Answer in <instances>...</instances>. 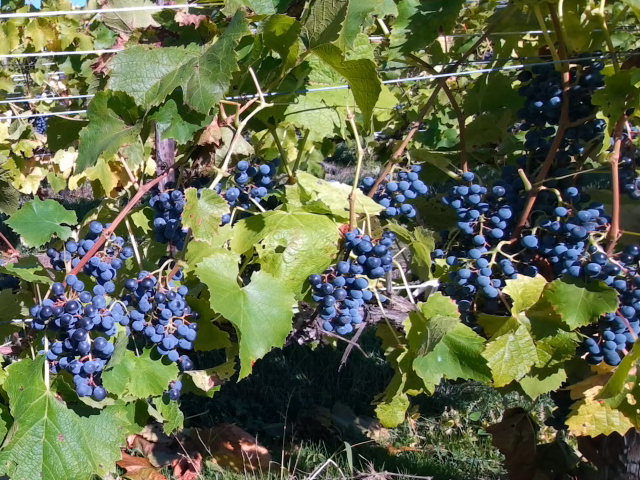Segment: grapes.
<instances>
[{"mask_svg":"<svg viewBox=\"0 0 640 480\" xmlns=\"http://www.w3.org/2000/svg\"><path fill=\"white\" fill-rule=\"evenodd\" d=\"M110 240H114V244L122 247L125 245L123 237H115L110 235ZM134 256V250L131 246H124L119 253V258L111 259L107 263H102V260L95 256L90 263L84 268V273L87 276H93L96 279V284L93 287V295L85 289V283L79 281L76 275H68L66 277V283L71 286L75 293H80L79 299L83 303L87 304L84 307V318L80 316L83 312L81 302L79 300L65 301L64 297H54L51 299L44 298L41 301V305H34L29 309V314L33 317H38L30 322L32 329L38 331H44L46 324L44 321L53 319L49 323V328L52 331H59V341H55L51 344L48 341V347L50 349L40 350L38 355L46 353V360L48 362L55 361L58 355H61L65 348L73 350L69 355L62 356L57 363H53L49 366V372L51 374L58 373L61 369L66 370L68 373H73L72 380L74 382V390L80 397L90 398L95 401H101L107 396V390L103 386H96L93 388L90 385L89 375H94L96 372L100 373L107 363L108 357L114 353L115 346L111 342H107L104 337H95L93 339L94 348L91 350V345L87 341L88 331L97 330L99 333L104 334L106 337H113L117 332L116 323L121 326H126V337H129L134 332H143L146 337L154 343H159L156 346V351L160 355H167V358L171 362H178L181 368L186 372H191L194 369V362L185 354H180L173 350L178 345L183 351L191 350L194 347V340L197 338V331L199 325L196 322H191L189 325H183L180 319H175L172 322V327L177 330L180 335L178 338L175 335H167L165 333V327L169 323L174 315L182 317L188 315L193 320H199L201 313L197 310H192L187 304L184 297L189 294V289L185 285H180L177 291L169 290L166 295L162 292H157V278L150 276L148 279H143L139 283L134 277H129L124 281V286L127 290L133 291V294L138 299L136 310H130L128 316L125 315L124 306H129L132 302L130 295H123L121 297V303H116L112 307V311H105L102 313L100 310H104L107 306V300L103 297L105 293H113L115 291V284L111 282L117 275V270H120L124 265V260L132 258ZM154 298L158 303V307L162 310L158 323L156 325H147L145 327V315L154 309V304L149 302ZM93 354L95 361H86L75 359L76 356Z\"/></svg>","mask_w":640,"mask_h":480,"instance_id":"grapes-1","label":"grapes"},{"mask_svg":"<svg viewBox=\"0 0 640 480\" xmlns=\"http://www.w3.org/2000/svg\"><path fill=\"white\" fill-rule=\"evenodd\" d=\"M609 221L610 215L604 211L603 204L589 202L586 209L578 210L575 217L570 216L567 222L543 219L540 227L553 232L546 234L540 243V238L533 234L522 237L520 244L531 250H539L543 256L548 257L551 266H557L562 259V276L565 279H580L584 275H592L593 278L606 281L614 290L621 291V314L631 324L639 339L640 285L620 279V267L612 260H607L603 252H596L594 245L589 246V251L594 254L585 264H580L579 258L584 257L585 247L589 244L588 232L598 230Z\"/></svg>","mask_w":640,"mask_h":480,"instance_id":"grapes-2","label":"grapes"},{"mask_svg":"<svg viewBox=\"0 0 640 480\" xmlns=\"http://www.w3.org/2000/svg\"><path fill=\"white\" fill-rule=\"evenodd\" d=\"M309 284L315 292L312 300L319 302L324 299L325 306L320 313V318L325 321L323 329L340 335L353 331L351 323L360 324L363 321L357 308L373 299V292L364 290L368 287V281L364 277L336 276L333 285L323 283L320 275L311 274Z\"/></svg>","mask_w":640,"mask_h":480,"instance_id":"grapes-3","label":"grapes"},{"mask_svg":"<svg viewBox=\"0 0 640 480\" xmlns=\"http://www.w3.org/2000/svg\"><path fill=\"white\" fill-rule=\"evenodd\" d=\"M344 247L352 249L358 257L360 264H354L351 260L340 261L338 271L352 275H368L370 279H378L386 273L392 271L394 263L393 252L390 250L394 246L395 233L385 230L379 245L372 246L371 238L363 235L359 238V231L351 229L345 234Z\"/></svg>","mask_w":640,"mask_h":480,"instance_id":"grapes-4","label":"grapes"},{"mask_svg":"<svg viewBox=\"0 0 640 480\" xmlns=\"http://www.w3.org/2000/svg\"><path fill=\"white\" fill-rule=\"evenodd\" d=\"M184 194L181 190L152 196L149 205L155 210L153 227L156 230L154 241L166 244L173 240L176 250H182L186 235L189 233L188 227H179L178 221L184 212L186 202L183 200Z\"/></svg>","mask_w":640,"mask_h":480,"instance_id":"grapes-5","label":"grapes"},{"mask_svg":"<svg viewBox=\"0 0 640 480\" xmlns=\"http://www.w3.org/2000/svg\"><path fill=\"white\" fill-rule=\"evenodd\" d=\"M422 171L420 164L411 165L409 167V173L406 171H399L397 178L402 180L399 185L396 182H389L387 189L392 192L400 190L402 194H395L393 201L401 204L400 206H392V196L389 193H384L379 199V204L386 209V214L389 217L402 216L405 214L408 218H415L417 216V209L408 203H404L406 198L415 199L418 194H427L429 192L428 185L419 180V173Z\"/></svg>","mask_w":640,"mask_h":480,"instance_id":"grapes-6","label":"grapes"},{"mask_svg":"<svg viewBox=\"0 0 640 480\" xmlns=\"http://www.w3.org/2000/svg\"><path fill=\"white\" fill-rule=\"evenodd\" d=\"M601 327L607 342L600 346L594 339H588L585 347L592 352L596 361L608 359L612 365H620L623 362L620 352L626 348V344L636 341L627 329L626 323L615 312H609L601 320Z\"/></svg>","mask_w":640,"mask_h":480,"instance_id":"grapes-7","label":"grapes"},{"mask_svg":"<svg viewBox=\"0 0 640 480\" xmlns=\"http://www.w3.org/2000/svg\"><path fill=\"white\" fill-rule=\"evenodd\" d=\"M488 189L482 187L480 184H471L453 186L450 190L451 196L459 195V199L454 197L443 196L442 203L449 205L450 209L455 210L454 214L459 220L456 222L457 228L463 230L466 235L474 233V228L471 226L479 220L480 214L489 210L490 204L481 201L480 194H487ZM464 197H468V202L472 205H476V209H467L463 207Z\"/></svg>","mask_w":640,"mask_h":480,"instance_id":"grapes-8","label":"grapes"},{"mask_svg":"<svg viewBox=\"0 0 640 480\" xmlns=\"http://www.w3.org/2000/svg\"><path fill=\"white\" fill-rule=\"evenodd\" d=\"M486 241V237L481 234H475L472 237V243L474 248L467 252L469 259H477L475 267L478 270V276L475 278L477 286L483 287V292L488 295L489 298H496L499 296V290L504 286V281L501 278H492L493 271L488 268V260L485 257H481L482 254L488 252V248L483 245Z\"/></svg>","mask_w":640,"mask_h":480,"instance_id":"grapes-9","label":"grapes"},{"mask_svg":"<svg viewBox=\"0 0 640 480\" xmlns=\"http://www.w3.org/2000/svg\"><path fill=\"white\" fill-rule=\"evenodd\" d=\"M98 240L99 237H96L94 240L80 239L78 242L75 240H69L66 243V252L64 250L57 251L55 248H50L47 251V256L50 258V263L54 266V269L56 271H61L63 269L65 259L66 261H70L73 254L86 256Z\"/></svg>","mask_w":640,"mask_h":480,"instance_id":"grapes-10","label":"grapes"},{"mask_svg":"<svg viewBox=\"0 0 640 480\" xmlns=\"http://www.w3.org/2000/svg\"><path fill=\"white\" fill-rule=\"evenodd\" d=\"M514 211L509 205H501L495 216L491 217L493 226L489 231L490 236L495 240H502L505 237V229L508 221L512 220Z\"/></svg>","mask_w":640,"mask_h":480,"instance_id":"grapes-11","label":"grapes"},{"mask_svg":"<svg viewBox=\"0 0 640 480\" xmlns=\"http://www.w3.org/2000/svg\"><path fill=\"white\" fill-rule=\"evenodd\" d=\"M471 276V268H462L457 271L449 272V278L454 280V284L457 287H462V293L467 296H473L476 293V286L474 284H467L468 279H470Z\"/></svg>","mask_w":640,"mask_h":480,"instance_id":"grapes-12","label":"grapes"},{"mask_svg":"<svg viewBox=\"0 0 640 480\" xmlns=\"http://www.w3.org/2000/svg\"><path fill=\"white\" fill-rule=\"evenodd\" d=\"M237 169L239 173L235 175V182L243 187L245 183L249 181V178L254 177L257 174V169L255 167H249V162L247 160H241L237 163Z\"/></svg>","mask_w":640,"mask_h":480,"instance_id":"grapes-13","label":"grapes"},{"mask_svg":"<svg viewBox=\"0 0 640 480\" xmlns=\"http://www.w3.org/2000/svg\"><path fill=\"white\" fill-rule=\"evenodd\" d=\"M626 253H622L619 256L620 264L625 266L634 262V256L639 254V247L636 244H630L625 246Z\"/></svg>","mask_w":640,"mask_h":480,"instance_id":"grapes-14","label":"grapes"},{"mask_svg":"<svg viewBox=\"0 0 640 480\" xmlns=\"http://www.w3.org/2000/svg\"><path fill=\"white\" fill-rule=\"evenodd\" d=\"M499 267L507 276H510L512 279L517 278L518 270L513 267L512 260L508 258H504L500 260Z\"/></svg>","mask_w":640,"mask_h":480,"instance_id":"grapes-15","label":"grapes"}]
</instances>
